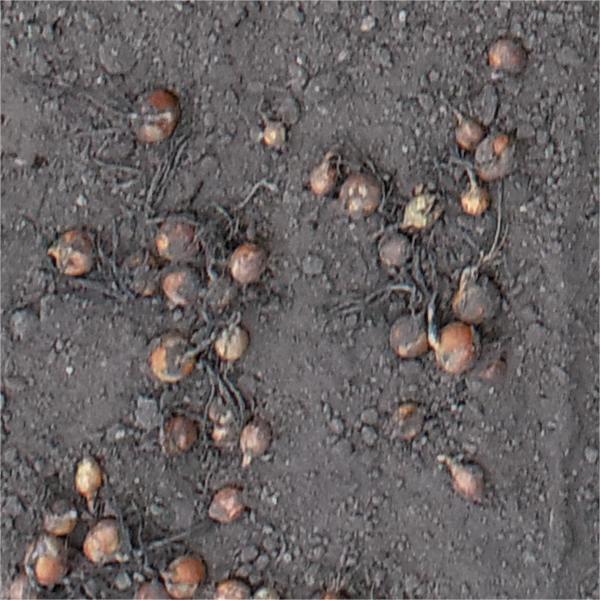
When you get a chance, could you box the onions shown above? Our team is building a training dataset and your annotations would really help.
[431,322,479,372]
[211,326,248,360]
[258,122,286,149]
[339,173,380,212]
[159,263,201,305]
[154,216,200,260]
[29,551,65,586]
[451,271,499,321]
[134,581,169,600]
[212,419,240,449]
[386,401,425,442]
[308,154,341,193]
[121,250,159,294]
[226,242,263,282]
[484,36,528,74]
[441,457,481,500]
[49,229,91,274]
[238,420,271,459]
[212,579,247,599]
[163,553,205,593]
[5,573,42,600]
[474,133,513,178]
[387,316,427,357]
[209,392,239,425]
[205,487,241,526]
[375,231,409,268]
[472,355,504,388]
[81,519,122,560]
[160,415,198,453]
[143,334,195,382]
[130,86,178,142]
[72,458,102,493]
[459,180,490,213]
[255,585,279,600]
[453,118,484,148]
[399,192,437,230]
[41,509,74,535]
